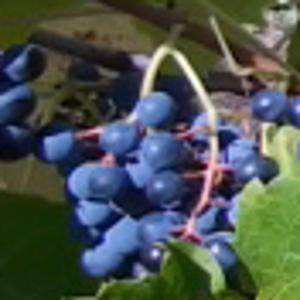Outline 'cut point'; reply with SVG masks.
<instances>
[{"instance_id":"6a23745f","label":"cut point","mask_w":300,"mask_h":300,"mask_svg":"<svg viewBox=\"0 0 300 300\" xmlns=\"http://www.w3.org/2000/svg\"><path fill=\"white\" fill-rule=\"evenodd\" d=\"M183 31L184 26L181 23H175L168 35L161 42L160 46L149 58L142 80V91L145 94H150L153 91L158 66L166 56L169 57L189 78L195 90L197 100L203 108L206 131L209 134H214L217 131V120L214 104L208 96L204 80L193 65L175 47H173L179 40Z\"/></svg>"}]
</instances>
